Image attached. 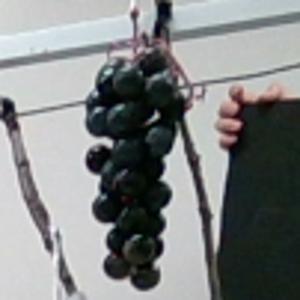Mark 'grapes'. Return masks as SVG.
<instances>
[{
  "mask_svg": "<svg viewBox=\"0 0 300 300\" xmlns=\"http://www.w3.org/2000/svg\"><path fill=\"white\" fill-rule=\"evenodd\" d=\"M171 71L163 46L143 50L135 67L128 58H109L86 101L89 134L113 140L112 151L97 145L84 156L89 172L103 174L101 195L92 204L94 217L115 225L105 238L111 253L103 270L113 280L129 278L139 291L155 288L162 279L155 262L165 251L162 208L172 201L173 191L160 178L166 171L163 158L175 145L174 122L187 107Z\"/></svg>",
  "mask_w": 300,
  "mask_h": 300,
  "instance_id": "1",
  "label": "grapes"
}]
</instances>
